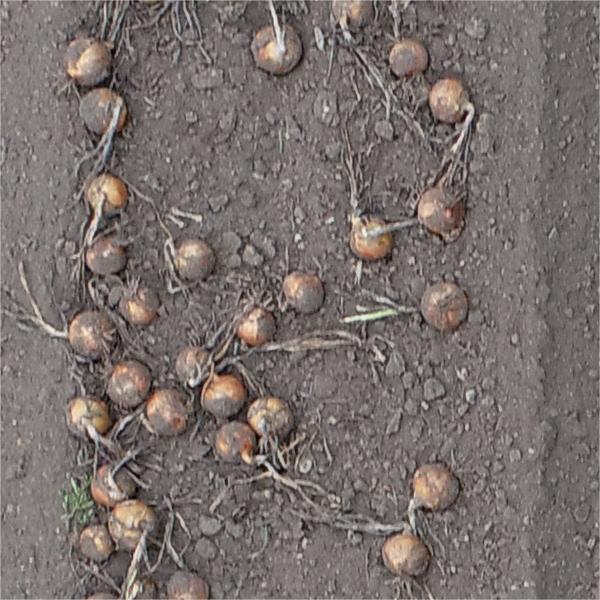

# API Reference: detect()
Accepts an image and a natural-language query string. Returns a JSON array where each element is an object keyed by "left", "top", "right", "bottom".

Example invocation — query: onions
[
  {"left": 386, "top": 36, "right": 426, "bottom": 76},
  {"left": 415, "top": 190, "right": 463, "bottom": 240},
  {"left": 282, "top": 270, "right": 323, "bottom": 311},
  {"left": 68, "top": 309, "right": 116, "bottom": 358},
  {"left": 202, "top": 373, "right": 245, "bottom": 417},
  {"left": 81, "top": 174, "right": 129, "bottom": 215},
  {"left": 120, "top": 577, "right": 156, "bottom": 600},
  {"left": 170, "top": 235, "right": 211, "bottom": 278},
  {"left": 173, "top": 344, "right": 212, "bottom": 383},
  {"left": 253, "top": 20, "right": 298, "bottom": 72},
  {"left": 108, "top": 500, "right": 154, "bottom": 546},
  {"left": 427, "top": 77, "right": 468, "bottom": 121},
  {"left": 66, "top": 38, "right": 111, "bottom": 83},
  {"left": 213, "top": 421, "right": 255, "bottom": 462},
  {"left": 338, "top": 0, "right": 372, "bottom": 30},
  {"left": 381, "top": 532, "right": 429, "bottom": 575},
  {"left": 94, "top": 463, "right": 128, "bottom": 502},
  {"left": 80, "top": 89, "right": 127, "bottom": 134},
  {"left": 67, "top": 395, "right": 110, "bottom": 434},
  {"left": 78, "top": 525, "right": 111, "bottom": 558},
  {"left": 105, "top": 359, "right": 151, "bottom": 406},
  {"left": 122, "top": 286, "right": 158, "bottom": 322},
  {"left": 419, "top": 281, "right": 467, "bottom": 332},
  {"left": 87, "top": 592, "right": 119, "bottom": 600},
  {"left": 164, "top": 570, "right": 208, "bottom": 599},
  {"left": 85, "top": 235, "right": 126, "bottom": 272},
  {"left": 246, "top": 394, "right": 291, "bottom": 436},
  {"left": 234, "top": 308, "right": 274, "bottom": 344},
  {"left": 410, "top": 463, "right": 458, "bottom": 510},
  {"left": 350, "top": 216, "right": 390, "bottom": 259},
  {"left": 144, "top": 387, "right": 191, "bottom": 432},
  {"left": 64, "top": 396, "right": 91, "bottom": 431},
  {"left": 86, "top": 405, "right": 113, "bottom": 433}
]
